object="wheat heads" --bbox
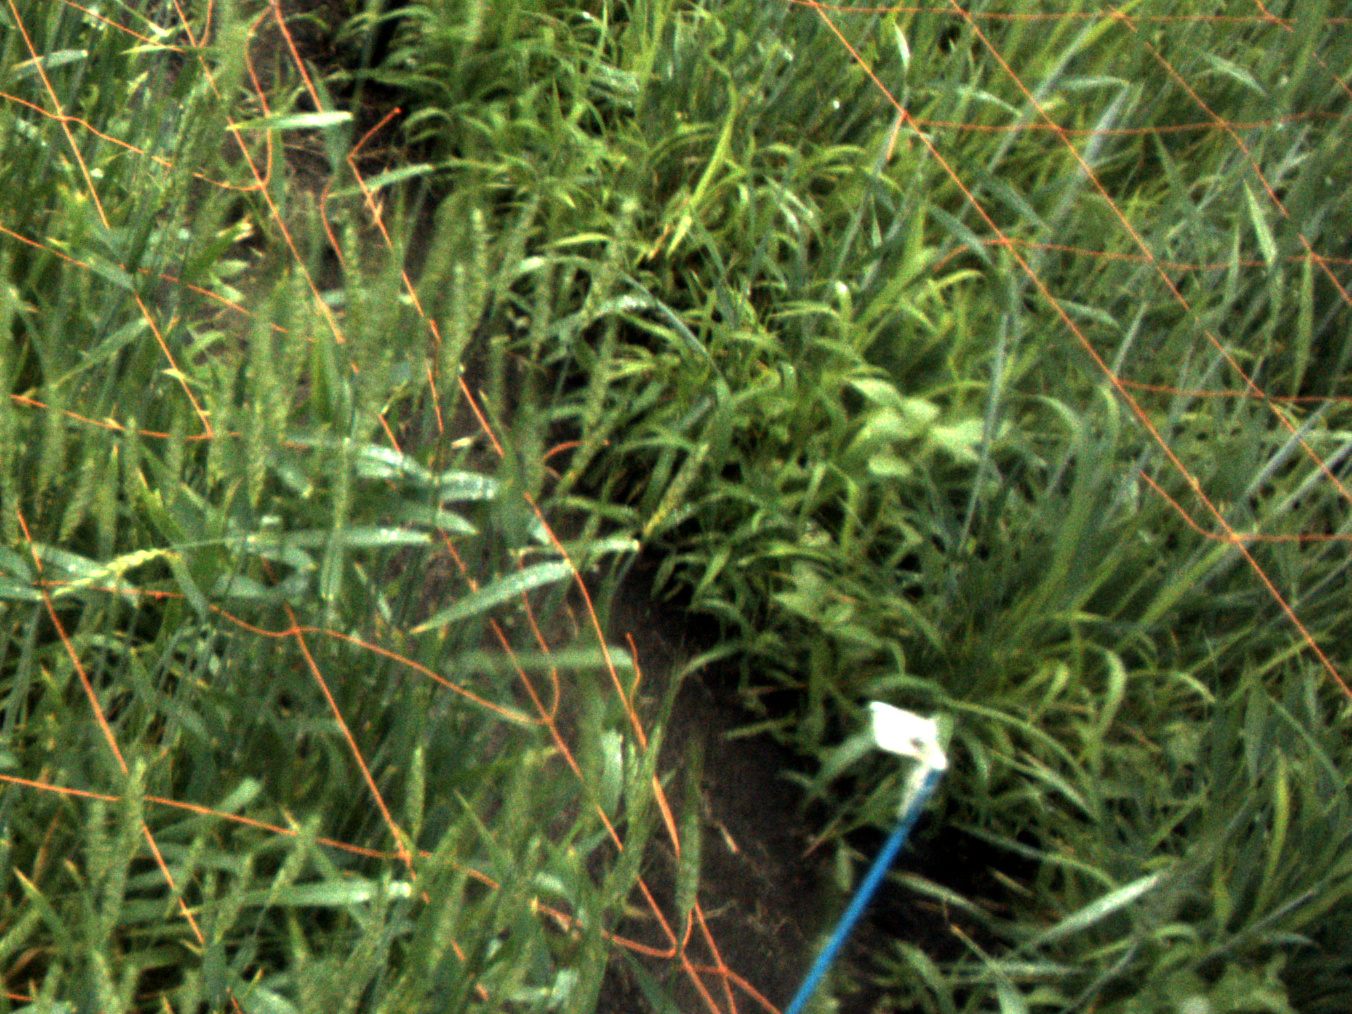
[161,196,195,262]
[457,0,499,50]
[326,445,352,526]
[96,963,140,1014]
[672,811,705,912]
[0,354,11,504]
[214,849,253,945]
[32,393,66,494]
[199,874,223,943]
[1183,0,1220,49]
[521,400,548,497]
[482,335,509,416]
[242,397,270,508]
[798,933,838,1014]
[187,0,212,34]
[549,941,606,1014]
[168,82,205,164]
[352,240,405,405]
[98,858,130,939]
[425,871,470,974]
[360,868,393,953]
[484,836,540,937]
[173,965,202,1014]
[728,38,765,81]
[131,134,152,214]
[292,937,327,1014]
[87,943,130,1014]
[404,743,426,837]
[0,247,15,339]
[461,202,487,343]
[496,758,533,853]
[623,736,644,830]
[161,836,204,919]
[250,299,291,426]
[493,192,541,303]
[56,455,99,544]
[197,86,229,182]
[640,724,663,791]
[436,260,471,396]
[485,937,535,1011]
[117,413,144,507]
[161,416,187,506]
[576,720,607,832]
[1137,843,1216,937]
[187,187,230,262]
[541,290,652,335]
[214,0,244,43]
[112,754,150,869]
[316,982,362,1014]
[24,962,63,1014]
[530,250,555,351]
[654,441,711,523]
[340,222,372,354]
[279,263,312,384]
[83,796,111,884]
[183,113,207,186]
[604,844,645,907]
[0,906,40,967]
[0,416,23,488]
[0,475,21,546]
[268,812,318,903]
[582,324,616,433]
[414,219,460,300]
[200,393,235,478]
[578,196,642,321]
[570,411,618,474]
[409,824,461,911]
